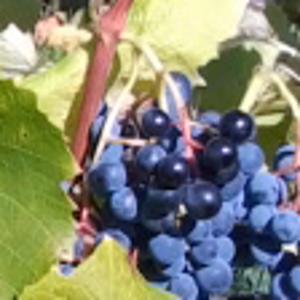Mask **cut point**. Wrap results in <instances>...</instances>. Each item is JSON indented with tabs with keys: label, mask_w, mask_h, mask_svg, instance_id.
<instances>
[{
	"label": "cut point",
	"mask_w": 300,
	"mask_h": 300,
	"mask_svg": "<svg viewBox=\"0 0 300 300\" xmlns=\"http://www.w3.org/2000/svg\"><path fill=\"white\" fill-rule=\"evenodd\" d=\"M118 43H128L141 48L145 53L152 72L155 75H159L163 82L170 80V73L165 63L157 57L154 48L147 40L133 34H121Z\"/></svg>",
	"instance_id": "1"
}]
</instances>
